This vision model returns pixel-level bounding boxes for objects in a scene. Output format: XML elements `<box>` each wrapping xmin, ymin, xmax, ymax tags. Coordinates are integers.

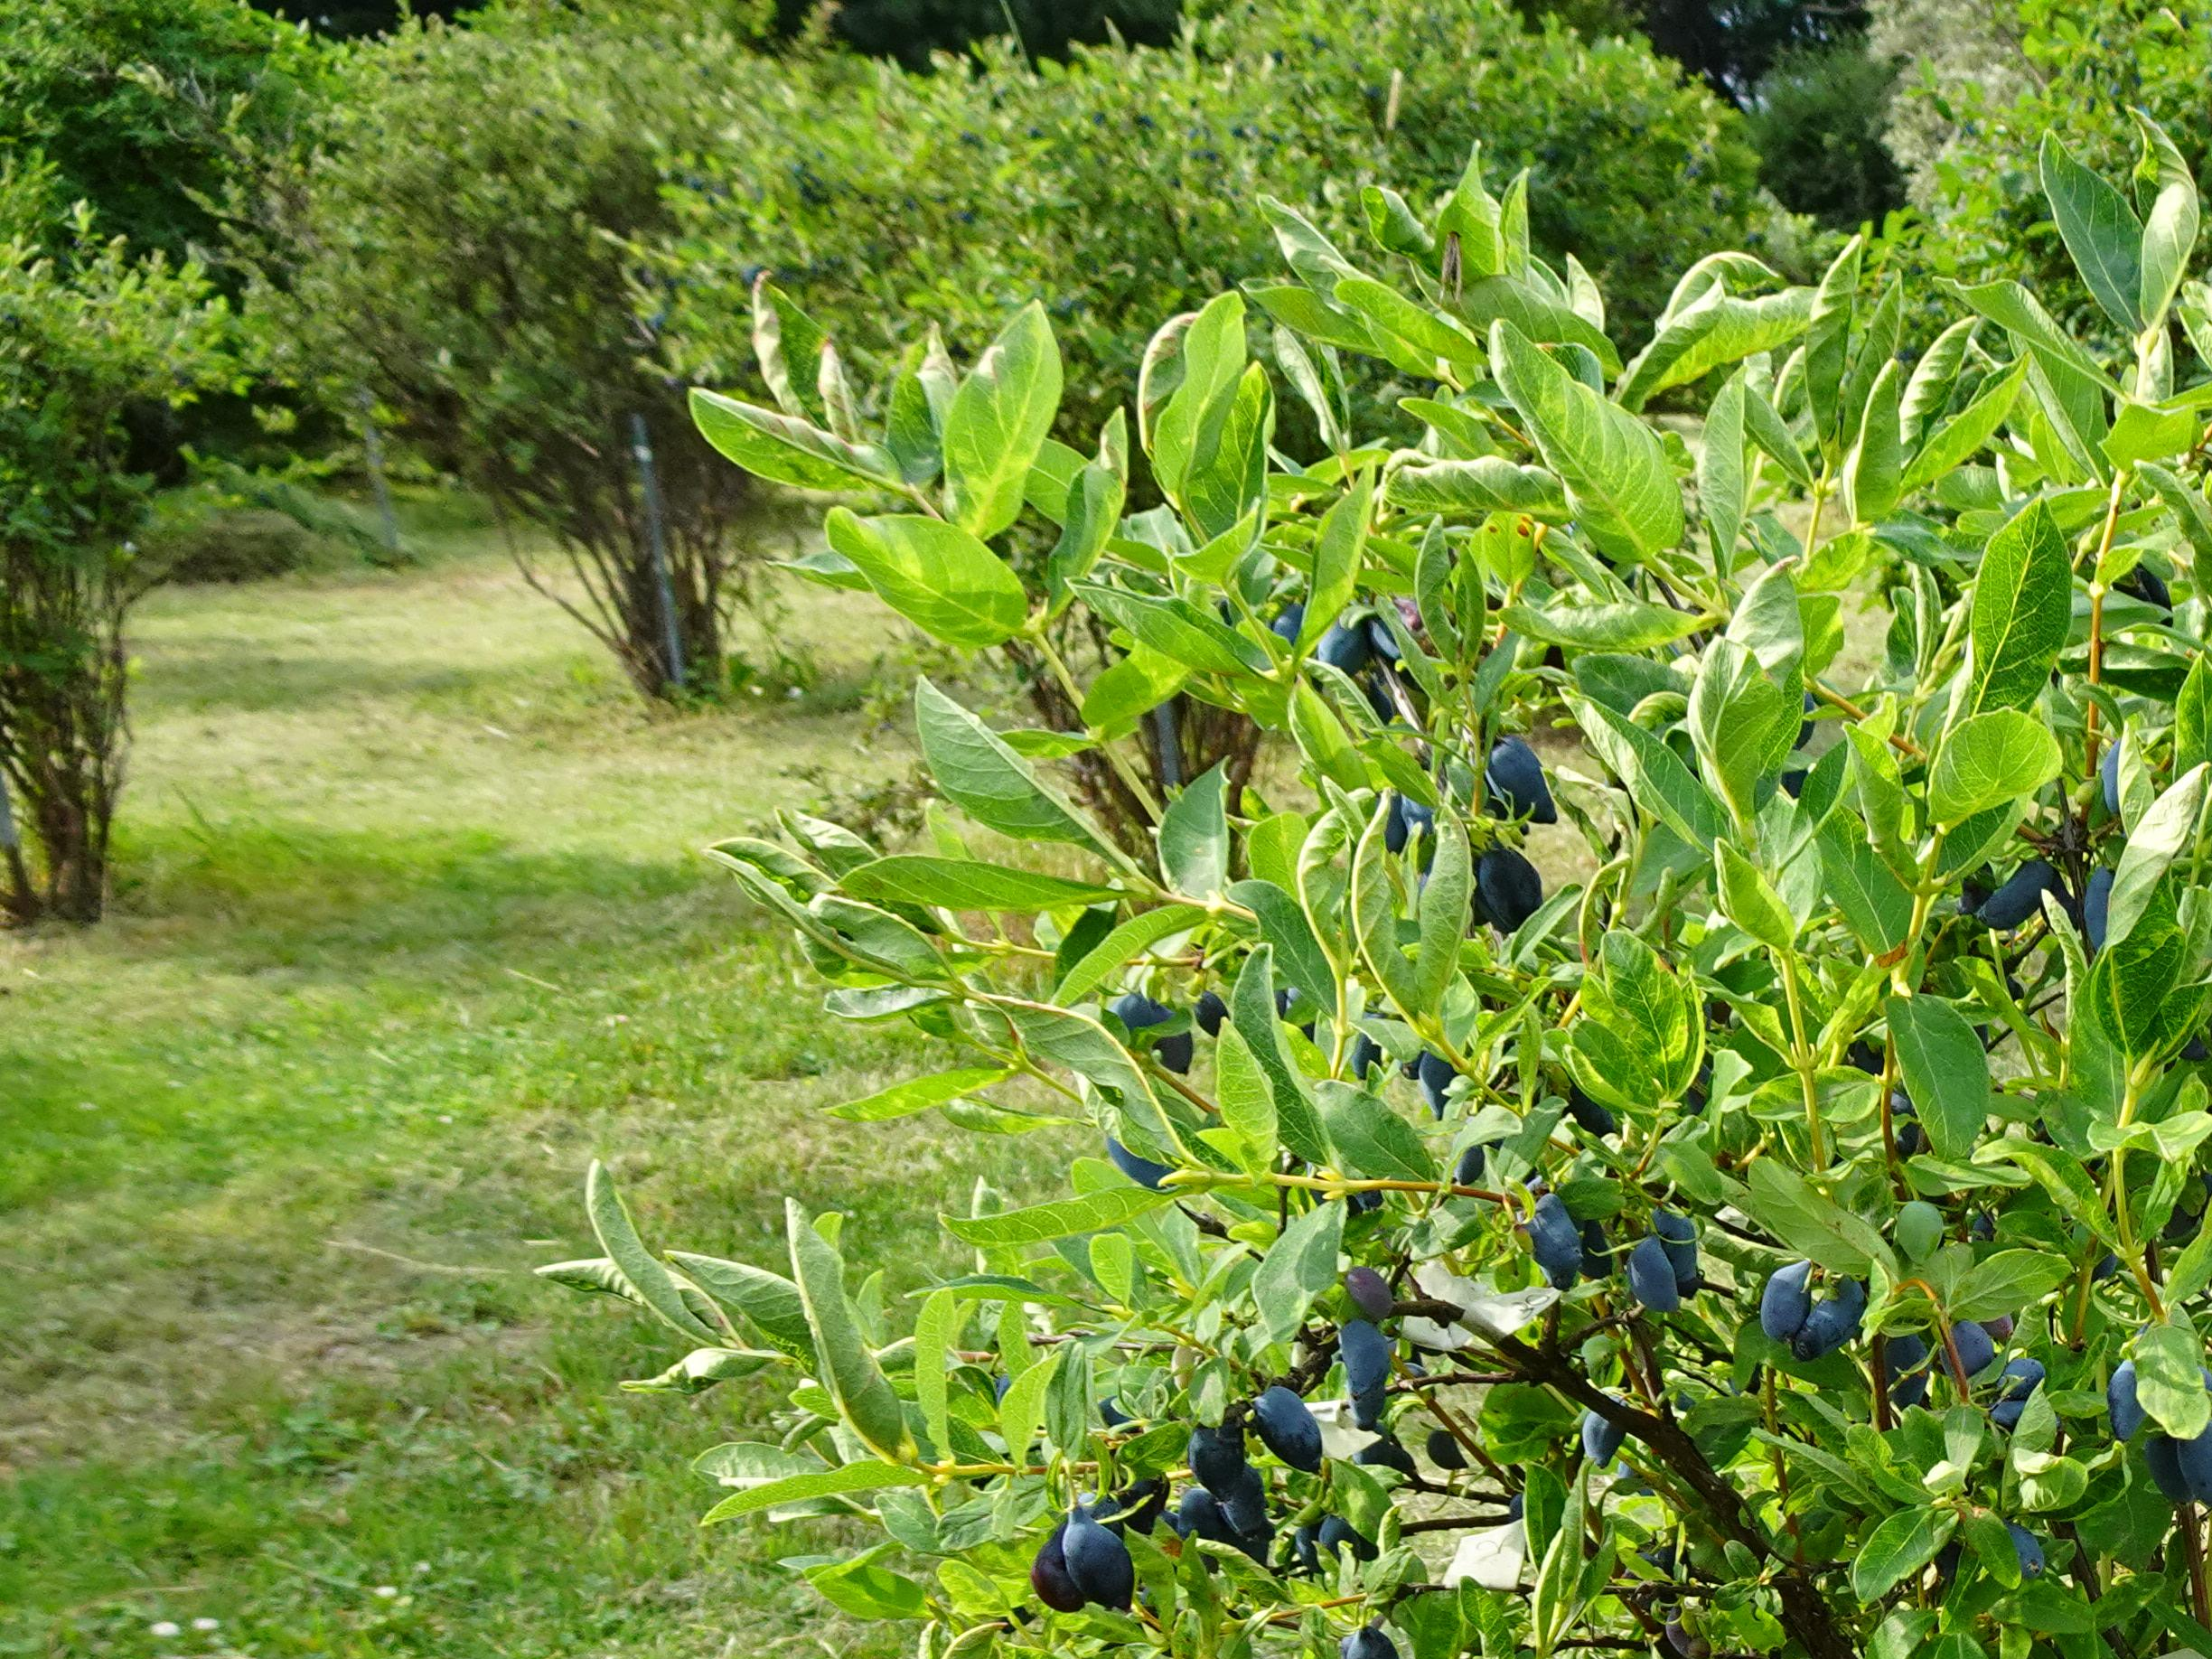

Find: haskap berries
<box><xmin>1638</xmin><ymin>1552</ymin><xmax>1664</xmax><ymax>1568</ymax></box>
<box><xmin>2101</xmin><ymin>733</ymin><xmax>2120</xmax><ymax>815</ymax></box>
<box><xmin>996</xmin><ymin>1604</ymin><xmax>1035</xmax><ymax>1633</ymax></box>
<box><xmin>2092</xmin><ymin>1253</ymin><xmax>2115</xmax><ymax>1278</ymax></box>
<box><xmin>1344</xmin><ymin>1267</ymin><xmax>1392</xmax><ymax>1323</ymax></box>
<box><xmin>1974</xmin><ymin>1214</ymin><xmax>1995</xmax><ymax>1236</ymax></box>
<box><xmin>2198</xmin><ymin>1171</ymin><xmax>2212</xmax><ymax>1195</ymax></box>
<box><xmin>1355</xmin><ymin>1384</ymin><xmax>1386</xmax><ymax>1427</ymax></box>
<box><xmin>1855</xmin><ymin>1041</ymin><xmax>1881</xmax><ymax>1072</ymax></box>
<box><xmin>1367</xmin><ymin>682</ymin><xmax>1391</xmax><ymax>725</ymax></box>
<box><xmin>1427</xmin><ymin>1433</ymin><xmax>1465</xmax><ymax>1471</ymax></box>
<box><xmin>2180</xmin><ymin>1035</ymin><xmax>2212</xmax><ymax>1060</ymax></box>
<box><xmin>1781</xmin><ymin>770</ymin><xmax>1805</xmax><ymax>797</ymax></box>
<box><xmin>1116</xmin><ymin>995</ymin><xmax>1171</xmax><ymax>1026</ymax></box>
<box><xmin>1710</xmin><ymin>1002</ymin><xmax>1730</xmax><ymax>1023</ymax></box>
<box><xmin>2004</xmin><ymin>977</ymin><xmax>2025</xmax><ymax>1000</ymax></box>
<box><xmin>1301</xmin><ymin>1024</ymin><xmax>1316</xmax><ymax>1039</ymax></box>
<box><xmin>2084</xmin><ymin>867</ymin><xmax>2111</xmax><ymax>955</ymax></box>
<box><xmin>1388</xmin><ymin>659</ymin><xmax>1426</xmax><ymax>694</ymax></box>
<box><xmin>1119</xmin><ymin>1466</ymin><xmax>1167</xmax><ymax>1536</ymax></box>
<box><xmin>1338</xmin><ymin>1317</ymin><xmax>1385</xmax><ymax>1390</ymax></box>
<box><xmin>1973</xmin><ymin>1025</ymin><xmax>1989</xmax><ymax>1042</ymax></box>
<box><xmin>1578</xmin><ymin>1218</ymin><xmax>1613</xmax><ymax>1287</ymax></box>
<box><xmin>1689</xmin><ymin>1088</ymin><xmax>1705</xmax><ymax>1112</ymax></box>
<box><xmin>1274</xmin><ymin>599</ymin><xmax>1303</xmax><ymax>643</ymax></box>
<box><xmin>1989</xmin><ymin>1314</ymin><xmax>2015</xmax><ymax>1335</ymax></box>
<box><xmin>2001</xmin><ymin>1358</ymin><xmax>2047</xmax><ymax>1395</ymax></box>
<box><xmin>1180</xmin><ymin>1491</ymin><xmax>1243</xmax><ymax>1537</ymax></box>
<box><xmin>1507</xmin><ymin>1491</ymin><xmax>1530</xmax><ymax>1518</ymax></box>
<box><xmin>1960</xmin><ymin>863</ymin><xmax>1993</xmax><ymax>916</ymax></box>
<box><xmin>2045</xmin><ymin>865</ymin><xmax>2073</xmax><ymax>906</ymax></box>
<box><xmin>1350</xmin><ymin>1625</ymin><xmax>1399</xmax><ymax>1659</ymax></box>
<box><xmin>1798</xmin><ymin>692</ymin><xmax>1819</xmax><ymax>749</ymax></box>
<box><xmin>1530</xmin><ymin>1195</ymin><xmax>1578</xmax><ymax>1286</ymax></box>
<box><xmin>1352</xmin><ymin>1440</ymin><xmax>1418</xmax><ymax>1469</ymax></box>
<box><xmin>1455</xmin><ymin>1143</ymin><xmax>1486</xmax><ymax>1185</ymax></box>
<box><xmin>1386</xmin><ymin>793</ymin><xmax>1409</xmax><ymax>853</ymax></box>
<box><xmin>1399</xmin><ymin>1057</ymin><xmax>1425</xmax><ymax>1080</ymax></box>
<box><xmin>1482</xmin><ymin>845</ymin><xmax>1544</xmax><ymax>927</ymax></box>
<box><xmin>1275</xmin><ymin>987</ymin><xmax>1288</xmax><ymax>1017</ymax></box>
<box><xmin>2051</xmin><ymin>668</ymin><xmax>2059</xmax><ymax>685</ymax></box>
<box><xmin>2152</xmin><ymin>1439</ymin><xmax>2191</xmax><ymax>1506</ymax></box>
<box><xmin>1067</xmin><ymin>1525</ymin><xmax>1131</xmax><ymax>1617</ymax></box>
<box><xmin>1674</xmin><ymin>1389</ymin><xmax>1697</xmax><ymax>1411</ymax></box>
<box><xmin>1761</xmin><ymin>1259</ymin><xmax>1811</xmax><ymax>1336</ymax></box>
<box><xmin>1792</xmin><ymin>1277</ymin><xmax>1866</xmax><ymax>1360</ymax></box>
<box><xmin>1889</xmin><ymin>1090</ymin><xmax>1910</xmax><ymax>1116</ymax></box>
<box><xmin>1099</xmin><ymin>1398</ymin><xmax>1131</xmax><ymax>1429</ymax></box>
<box><xmin>1354</xmin><ymin>1183</ymin><xmax>1388</xmax><ymax>1213</ymax></box>
<box><xmin>994</xmin><ymin>1377</ymin><xmax>1012</xmax><ymax>1401</ymax></box>
<box><xmin>1659</xmin><ymin>1545</ymin><xmax>1675</xmax><ymax>1567</ymax></box>
<box><xmin>1655</xmin><ymin>1206</ymin><xmax>1698</xmax><ymax>1290</ymax></box>
<box><xmin>1745</xmin><ymin>1368</ymin><xmax>1761</xmax><ymax>1394</ymax></box>
<box><xmin>1578</xmin><ymin>1406</ymin><xmax>1620</xmax><ymax>1469</ymax></box>
<box><xmin>1229</xmin><ymin>1465</ymin><xmax>1264</xmax><ymax>1534</ymax></box>
<box><xmin>1882</xmin><ymin>1326</ymin><xmax>1927</xmax><ymax>1414</ymax></box>
<box><xmin>1367</xmin><ymin>616</ymin><xmax>1402</xmax><ymax>659</ymax></box>
<box><xmin>1219</xmin><ymin>600</ymin><xmax>1231</xmax><ymax>625</ymax></box>
<box><xmin>1354</xmin><ymin>1034</ymin><xmax>1381</xmax><ymax>1082</ymax></box>
<box><xmin>1991</xmin><ymin>1400</ymin><xmax>2027</xmax><ymax>1422</ymax></box>
<box><xmin>2186</xmin><ymin>1426</ymin><xmax>2212</xmax><ymax>1517</ymax></box>
<box><xmin>1092</xmin><ymin>1496</ymin><xmax>1122</xmax><ymax>1539</ymax></box>
<box><xmin>1188</xmin><ymin>1425</ymin><xmax>1244</xmax><ymax>1495</ymax></box>
<box><xmin>1354</xmin><ymin>1535</ymin><xmax>1381</xmax><ymax>1562</ymax></box>
<box><xmin>1485</xmin><ymin>737</ymin><xmax>1558</xmax><ymax>825</ymax></box>
<box><xmin>1195</xmin><ymin>992</ymin><xmax>1231</xmax><ymax>1037</ymax></box>
<box><xmin>1667</xmin><ymin>1609</ymin><xmax>1702</xmax><ymax>1650</ymax></box>
<box><xmin>1318</xmin><ymin>620</ymin><xmax>1367</xmax><ymax>673</ymax></box>
<box><xmin>1898</xmin><ymin>1199</ymin><xmax>1943</xmax><ymax>1263</ymax></box>
<box><xmin>1151</xmin><ymin>1029</ymin><xmax>1193</xmax><ymax>1074</ymax></box>
<box><xmin>2163</xmin><ymin>1209</ymin><xmax>2196</xmax><ymax>1241</ymax></box>
<box><xmin>2128</xmin><ymin>560</ymin><xmax>2171</xmax><ymax>627</ymax></box>
<box><xmin>1405</xmin><ymin>798</ymin><xmax>1433</xmax><ymax>835</ymax></box>
<box><xmin>1896</xmin><ymin>1125</ymin><xmax>1918</xmax><ymax>1156</ymax></box>
<box><xmin>1105</xmin><ymin>1132</ymin><xmax>1172</xmax><ymax>1192</ymax></box>
<box><xmin>1037</xmin><ymin>1530</ymin><xmax>1073</xmax><ymax>1616</ymax></box>
<box><xmin>1982</xmin><ymin>861</ymin><xmax>2047</xmax><ymax>927</ymax></box>
<box><xmin>1391</xmin><ymin>598</ymin><xmax>1424</xmax><ymax>631</ymax></box>
<box><xmin>1293</xmin><ymin>1514</ymin><xmax>1321</xmax><ymax>1576</ymax></box>
<box><xmin>1573</xmin><ymin>1094</ymin><xmax>1611</xmax><ymax>1136</ymax></box>
<box><xmin>1617</xmin><ymin>1461</ymin><xmax>1645</xmax><ymax>1480</ymax></box>
<box><xmin>1257</xmin><ymin>1388</ymin><xmax>1322</xmax><ymax>1469</ymax></box>
<box><xmin>1631</xmin><ymin>1238</ymin><xmax>1678</xmax><ymax>1312</ymax></box>
<box><xmin>1947</xmin><ymin>1318</ymin><xmax>1993</xmax><ymax>1372</ymax></box>
<box><xmin>2200</xmin><ymin>1372</ymin><xmax>2212</xmax><ymax>1390</ymax></box>
<box><xmin>2109</xmin><ymin>1360</ymin><xmax>2139</xmax><ymax>1439</ymax></box>
<box><xmin>1420</xmin><ymin>1050</ymin><xmax>1454</xmax><ymax>1119</ymax></box>
<box><xmin>1318</xmin><ymin>1513</ymin><xmax>1356</xmax><ymax>1573</ymax></box>
<box><xmin>2006</xmin><ymin>1524</ymin><xmax>2041</xmax><ymax>1580</ymax></box>
<box><xmin>1403</xmin><ymin>1362</ymin><xmax>1428</xmax><ymax>1378</ymax></box>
